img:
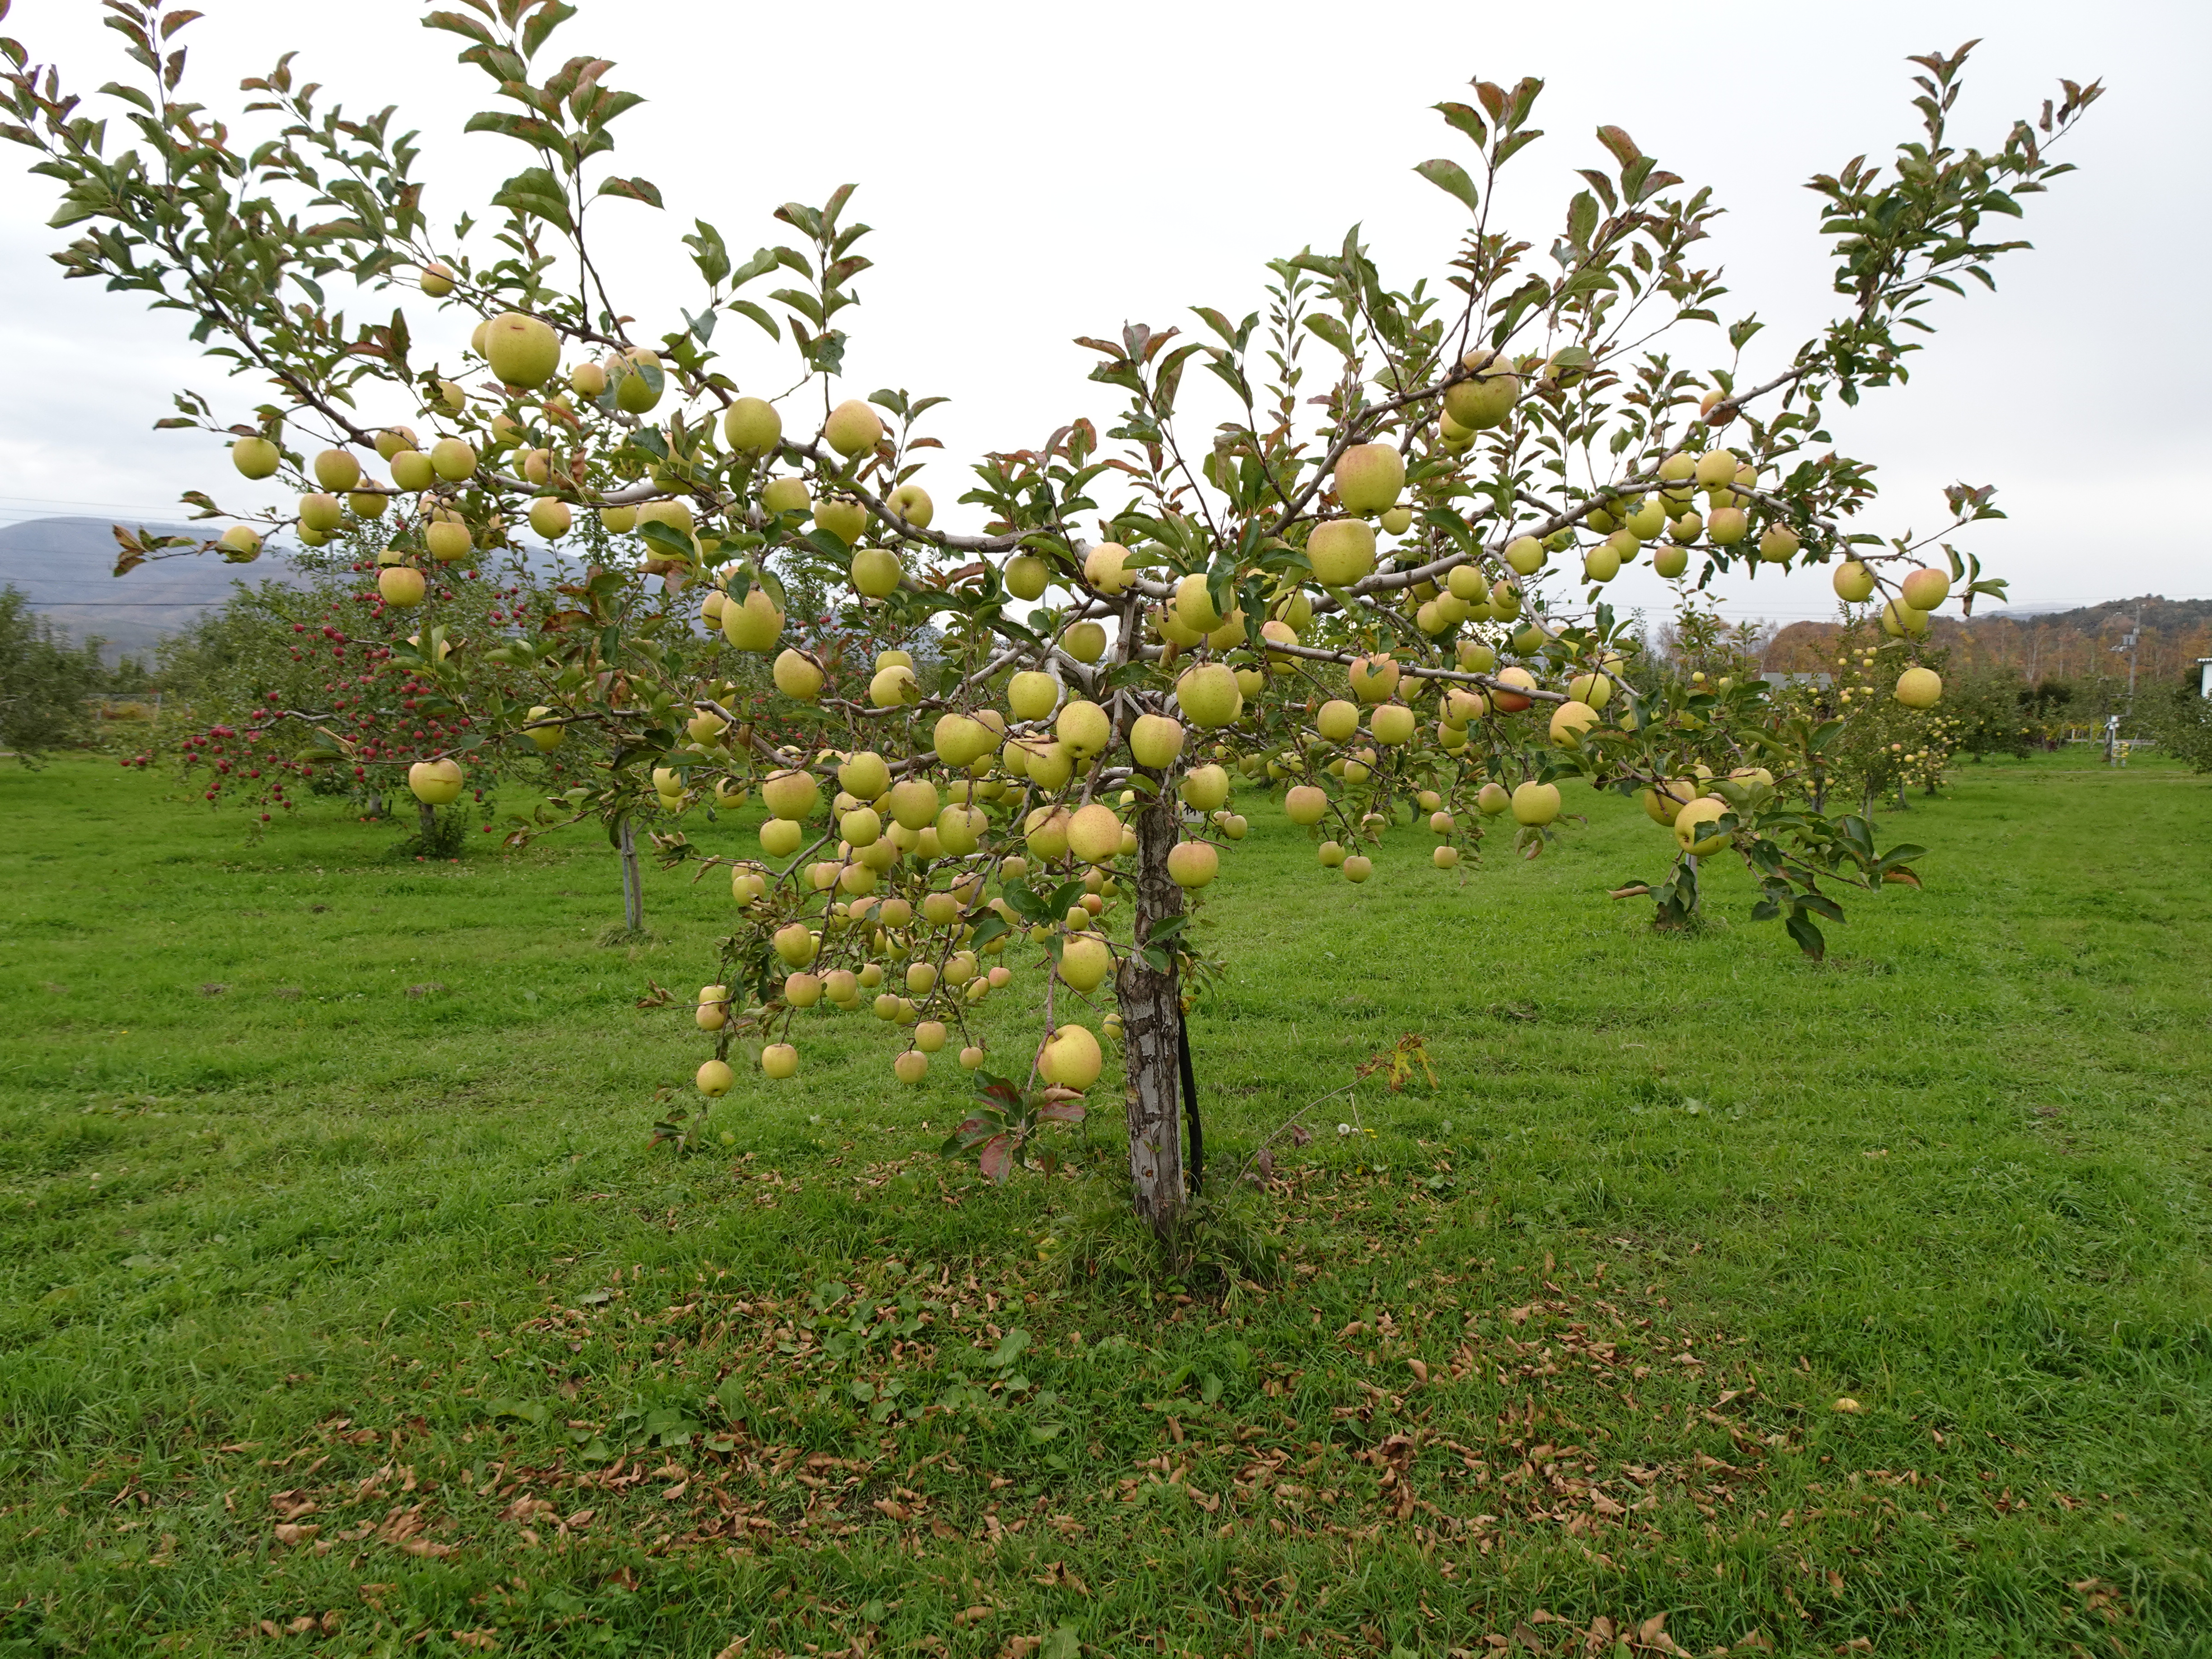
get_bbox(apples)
[542,394,573,425]
[696,1060,732,1097]
[1065,907,1089,932]
[1833,561,1877,602]
[1201,603,1247,650]
[988,967,1011,988]
[233,437,280,481]
[471,319,493,360]
[1178,798,1187,826]
[1066,804,1122,864]
[946,780,979,805]
[814,862,846,897]
[732,874,766,907]
[824,969,857,1002]
[872,928,889,953]
[1000,856,1027,880]
[762,477,811,530]
[1267,753,1291,779]
[967,709,1004,755]
[1317,700,1359,743]
[1700,389,1737,426]
[696,1000,726,1031]
[1881,597,1928,640]
[1270,582,1304,603]
[951,872,983,904]
[892,998,917,1025]
[1710,488,1750,511]
[1327,751,1352,777]
[1597,652,1623,679]
[692,526,721,557]
[1108,957,1125,972]
[1270,655,1303,675]
[1511,780,1560,827]
[1542,525,1575,553]
[977,770,1007,801]
[971,966,979,977]
[1733,464,1757,490]
[409,758,463,805]
[1155,598,1203,648]
[1466,594,1492,622]
[851,548,901,598]
[1399,675,1428,703]
[700,590,728,629]
[1417,601,1449,635]
[840,807,881,847]
[760,818,801,858]
[1024,791,1052,810]
[1344,760,1369,785]
[1175,573,1236,633]
[1403,586,1424,616]
[1348,651,1399,703]
[1370,705,1415,746]
[1512,622,1544,653]
[1334,444,1405,517]
[513,449,533,481]
[599,504,637,534]
[886,819,920,854]
[1079,869,1104,894]
[1411,574,1445,600]
[1696,449,1737,493]
[886,932,915,962]
[933,713,986,767]
[803,862,823,890]
[1130,714,1184,769]
[1654,545,1688,578]
[1220,691,1243,725]
[1433,846,1458,869]
[1504,535,1543,576]
[1481,690,1508,716]
[782,944,814,969]
[1760,522,1800,563]
[825,399,883,459]
[379,567,425,608]
[1276,593,1312,634]
[1606,528,1641,564]
[1396,777,1420,797]
[721,589,785,652]
[835,988,861,1011]
[1343,856,1371,884]
[875,650,913,674]
[1443,350,1519,430]
[960,753,994,777]
[874,838,897,873]
[377,546,416,572]
[1585,545,1621,583]
[973,977,989,997]
[999,780,1026,807]
[419,494,437,518]
[406,636,451,676]
[1102,1014,1123,1040]
[1003,730,1039,777]
[491,414,526,450]
[1727,767,1774,789]
[1562,631,1598,664]
[1464,758,1487,781]
[959,1047,984,1070]
[1379,501,1412,535]
[874,993,900,1021]
[988,898,1020,926]
[431,381,466,419]
[914,827,944,860]
[1078,893,1103,917]
[687,707,732,748]
[1674,798,1732,857]
[731,859,766,884]
[1119,790,1136,813]
[1440,430,1477,454]
[889,779,939,830]
[857,963,883,988]
[1430,812,1454,835]
[886,484,933,529]
[1492,667,1537,712]
[471,510,507,551]
[894,1050,928,1084]
[906,962,938,994]
[775,745,802,761]
[1658,486,1693,516]
[773,923,811,959]
[707,679,735,710]
[1212,811,1232,829]
[646,533,702,578]
[936,803,988,856]
[785,972,822,1007]
[1587,507,1627,534]
[773,648,824,699]
[983,935,1006,955]
[1669,511,1702,544]
[1446,739,1469,759]
[849,897,881,929]
[942,957,972,985]
[1306,518,1376,587]
[1360,813,1386,836]
[1478,783,1510,815]
[1082,984,1098,995]
[951,923,974,943]
[1230,663,1263,698]
[724,396,782,457]
[1167,841,1218,888]
[1075,754,1096,777]
[950,950,976,974]
[391,450,435,492]
[971,886,987,908]
[1489,596,1520,623]
[1246,568,1278,599]
[1902,568,1949,611]
[923,893,957,925]
[1606,479,1645,517]
[866,760,890,800]
[1353,747,1377,767]
[962,982,979,1000]
[571,362,605,401]
[1454,640,1476,655]
[859,835,892,868]
[1224,815,1248,840]
[841,861,877,895]
[813,491,867,546]
[1568,673,1611,711]
[375,425,418,463]
[1296,732,1320,747]
[1119,831,1138,856]
[422,506,465,535]
[1436,591,1470,624]
[658,788,690,813]
[870,665,916,709]
[1434,664,1469,693]
[1542,625,1568,659]
[1030,921,1055,944]
[426,521,471,561]
[602,346,665,414]
[315,449,360,493]
[838,840,861,864]
[1091,931,1106,944]
[1286,752,1303,776]
[648,436,704,496]
[761,1043,798,1079]
[524,448,560,486]
[1057,931,1109,992]
[716,566,740,591]
[484,311,561,389]
[425,497,452,516]
[1439,688,1483,731]
[299,493,341,531]
[1677,764,1713,799]
[1008,671,1058,722]
[1620,705,1660,731]
[1896,667,1941,709]
[1416,791,1441,815]
[1005,554,1049,601]
[652,767,686,797]
[1625,499,1666,540]
[1120,823,1135,834]
[348,479,388,519]
[715,777,747,809]
[221,526,262,563]
[1091,859,1116,881]
[1658,452,1695,482]
[609,445,646,481]
[1215,739,1237,764]
[950,900,968,925]
[1549,701,1600,751]
[420,263,454,298]
[1461,644,1495,673]
[1099,875,1120,898]
[932,999,955,1023]
[1285,785,1327,825]
[809,930,824,958]
[699,985,728,1007]
[1438,721,1468,749]
[431,438,477,482]
[1318,841,1346,868]
[1004,930,1015,938]
[1176,662,1239,728]
[1024,734,1074,788]
[1037,1024,1102,1091]
[817,968,833,997]
[814,749,845,764]
[821,902,851,932]
[1469,576,1489,606]
[636,500,694,555]
[1708,507,1747,545]
[833,791,869,822]
[529,496,571,539]
[1545,348,1584,388]
[1749,1628,1772,1647]
[1447,565,1482,600]
[1439,408,1475,441]
[521,706,565,752]
[1259,620,1298,662]
[837,751,885,800]
[1024,805,1074,865]
[1180,764,1229,811]
[298,519,331,547]
[1645,775,1697,827]
[914,1021,946,1052]
[762,769,817,820]
[1064,621,1106,664]
[1493,580,1520,609]
[1084,542,1137,595]
[871,791,890,815]
[880,899,911,928]
[1056,700,1110,758]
